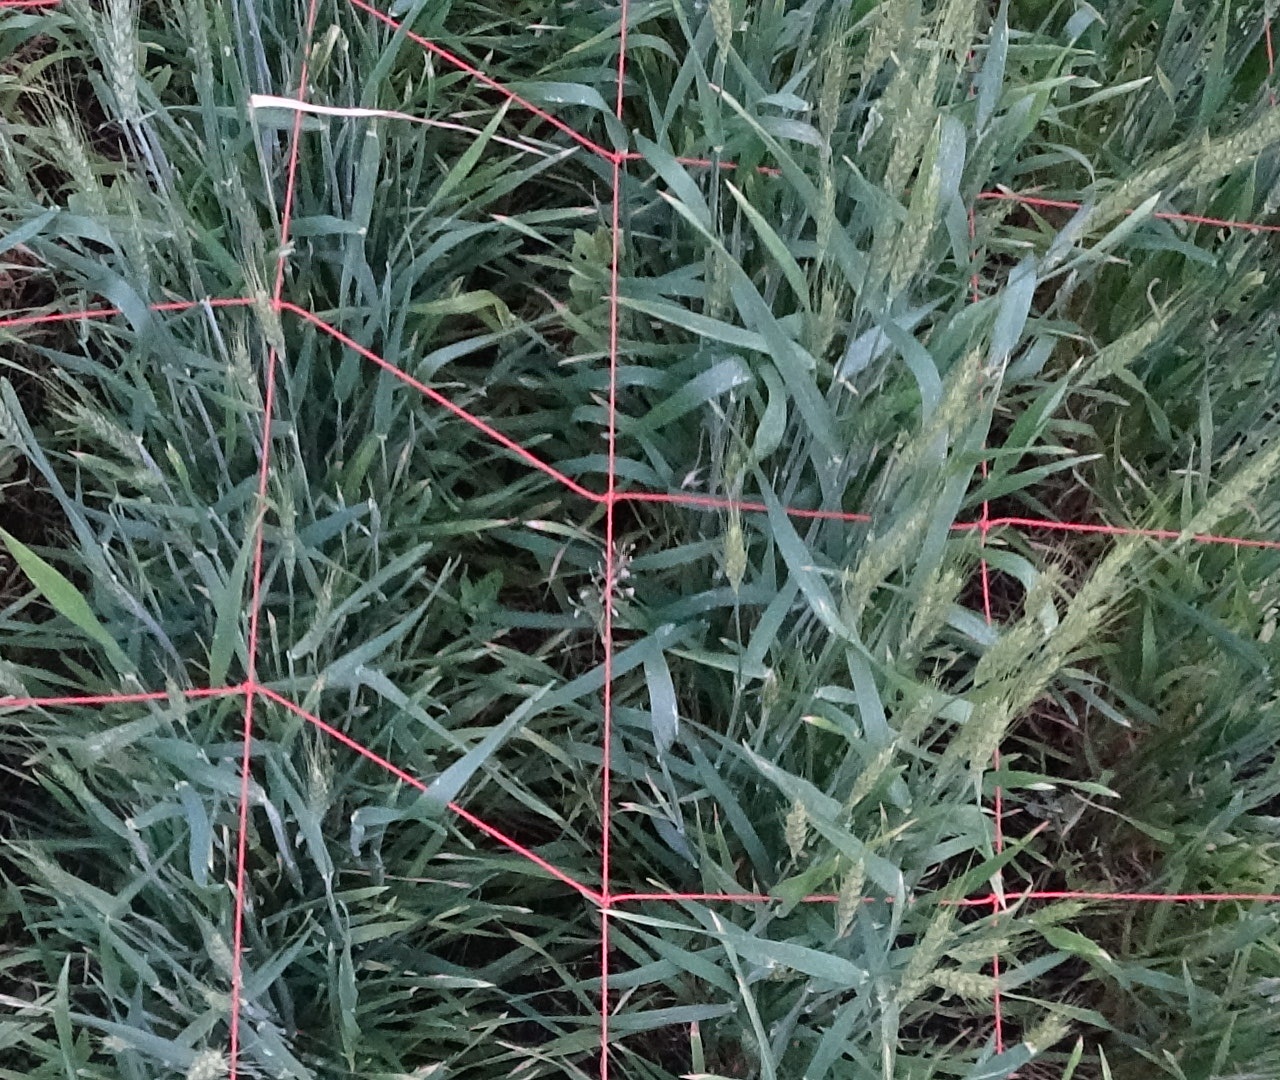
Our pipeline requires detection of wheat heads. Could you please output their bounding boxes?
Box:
[818,287,836,351]
[1081,321,1159,389]
[250,285,280,349]
[978,626,1024,680]
[51,109,95,204]
[849,397,893,455]
[722,521,747,582]
[934,346,989,426]
[279,504,301,572]
[785,797,812,846]
[703,240,738,320]
[1025,899,1082,928]
[1069,168,1174,231]
[950,929,1010,961]
[1017,658,1058,703]
[69,400,139,457]
[818,165,835,271]
[895,679,938,736]
[304,588,336,644]
[100,568,130,608]
[0,384,34,452]
[903,564,976,649]
[121,227,154,298]
[836,863,871,928]
[940,708,981,781]
[1026,556,1057,610]
[899,436,920,465]
[958,4,977,50]
[1032,1014,1074,1045]
[205,992,235,1015]
[307,760,328,810]
[700,0,733,44]
[929,972,993,1001]
[858,219,893,295]
[170,514,198,553]
[180,0,216,90]
[135,465,162,485]
[100,1036,134,1056]
[1196,112,1280,173]
[232,345,263,401]
[865,509,934,596]
[904,907,951,994]
[0,670,41,702]
[1073,541,1133,606]
[223,158,250,221]
[212,933,246,984]
[879,60,944,197]
[963,135,998,187]
[719,439,744,486]
[849,750,894,800]
[103,0,143,117]
[1041,621,1102,661]
[826,32,842,138]
[1182,439,1280,531]
[876,182,948,308]
[979,698,1010,779]
[861,0,913,81]
[185,1049,227,1080]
